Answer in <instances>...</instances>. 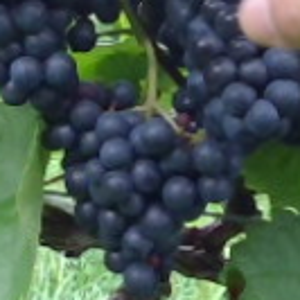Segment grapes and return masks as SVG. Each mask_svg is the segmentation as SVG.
Instances as JSON below:
<instances>
[{
  "mask_svg": "<svg viewBox=\"0 0 300 300\" xmlns=\"http://www.w3.org/2000/svg\"><path fill=\"white\" fill-rule=\"evenodd\" d=\"M240 1L134 0L141 28L189 69L169 105L141 101L129 78L79 75L75 55L98 46L89 17L116 23L117 0H0L4 101L45 114L76 222L139 300L157 296L185 223L235 195L251 146L275 134L300 144V51L250 39Z\"/></svg>",
  "mask_w": 300,
  "mask_h": 300,
  "instance_id": "1",
  "label": "grapes"
}]
</instances>
